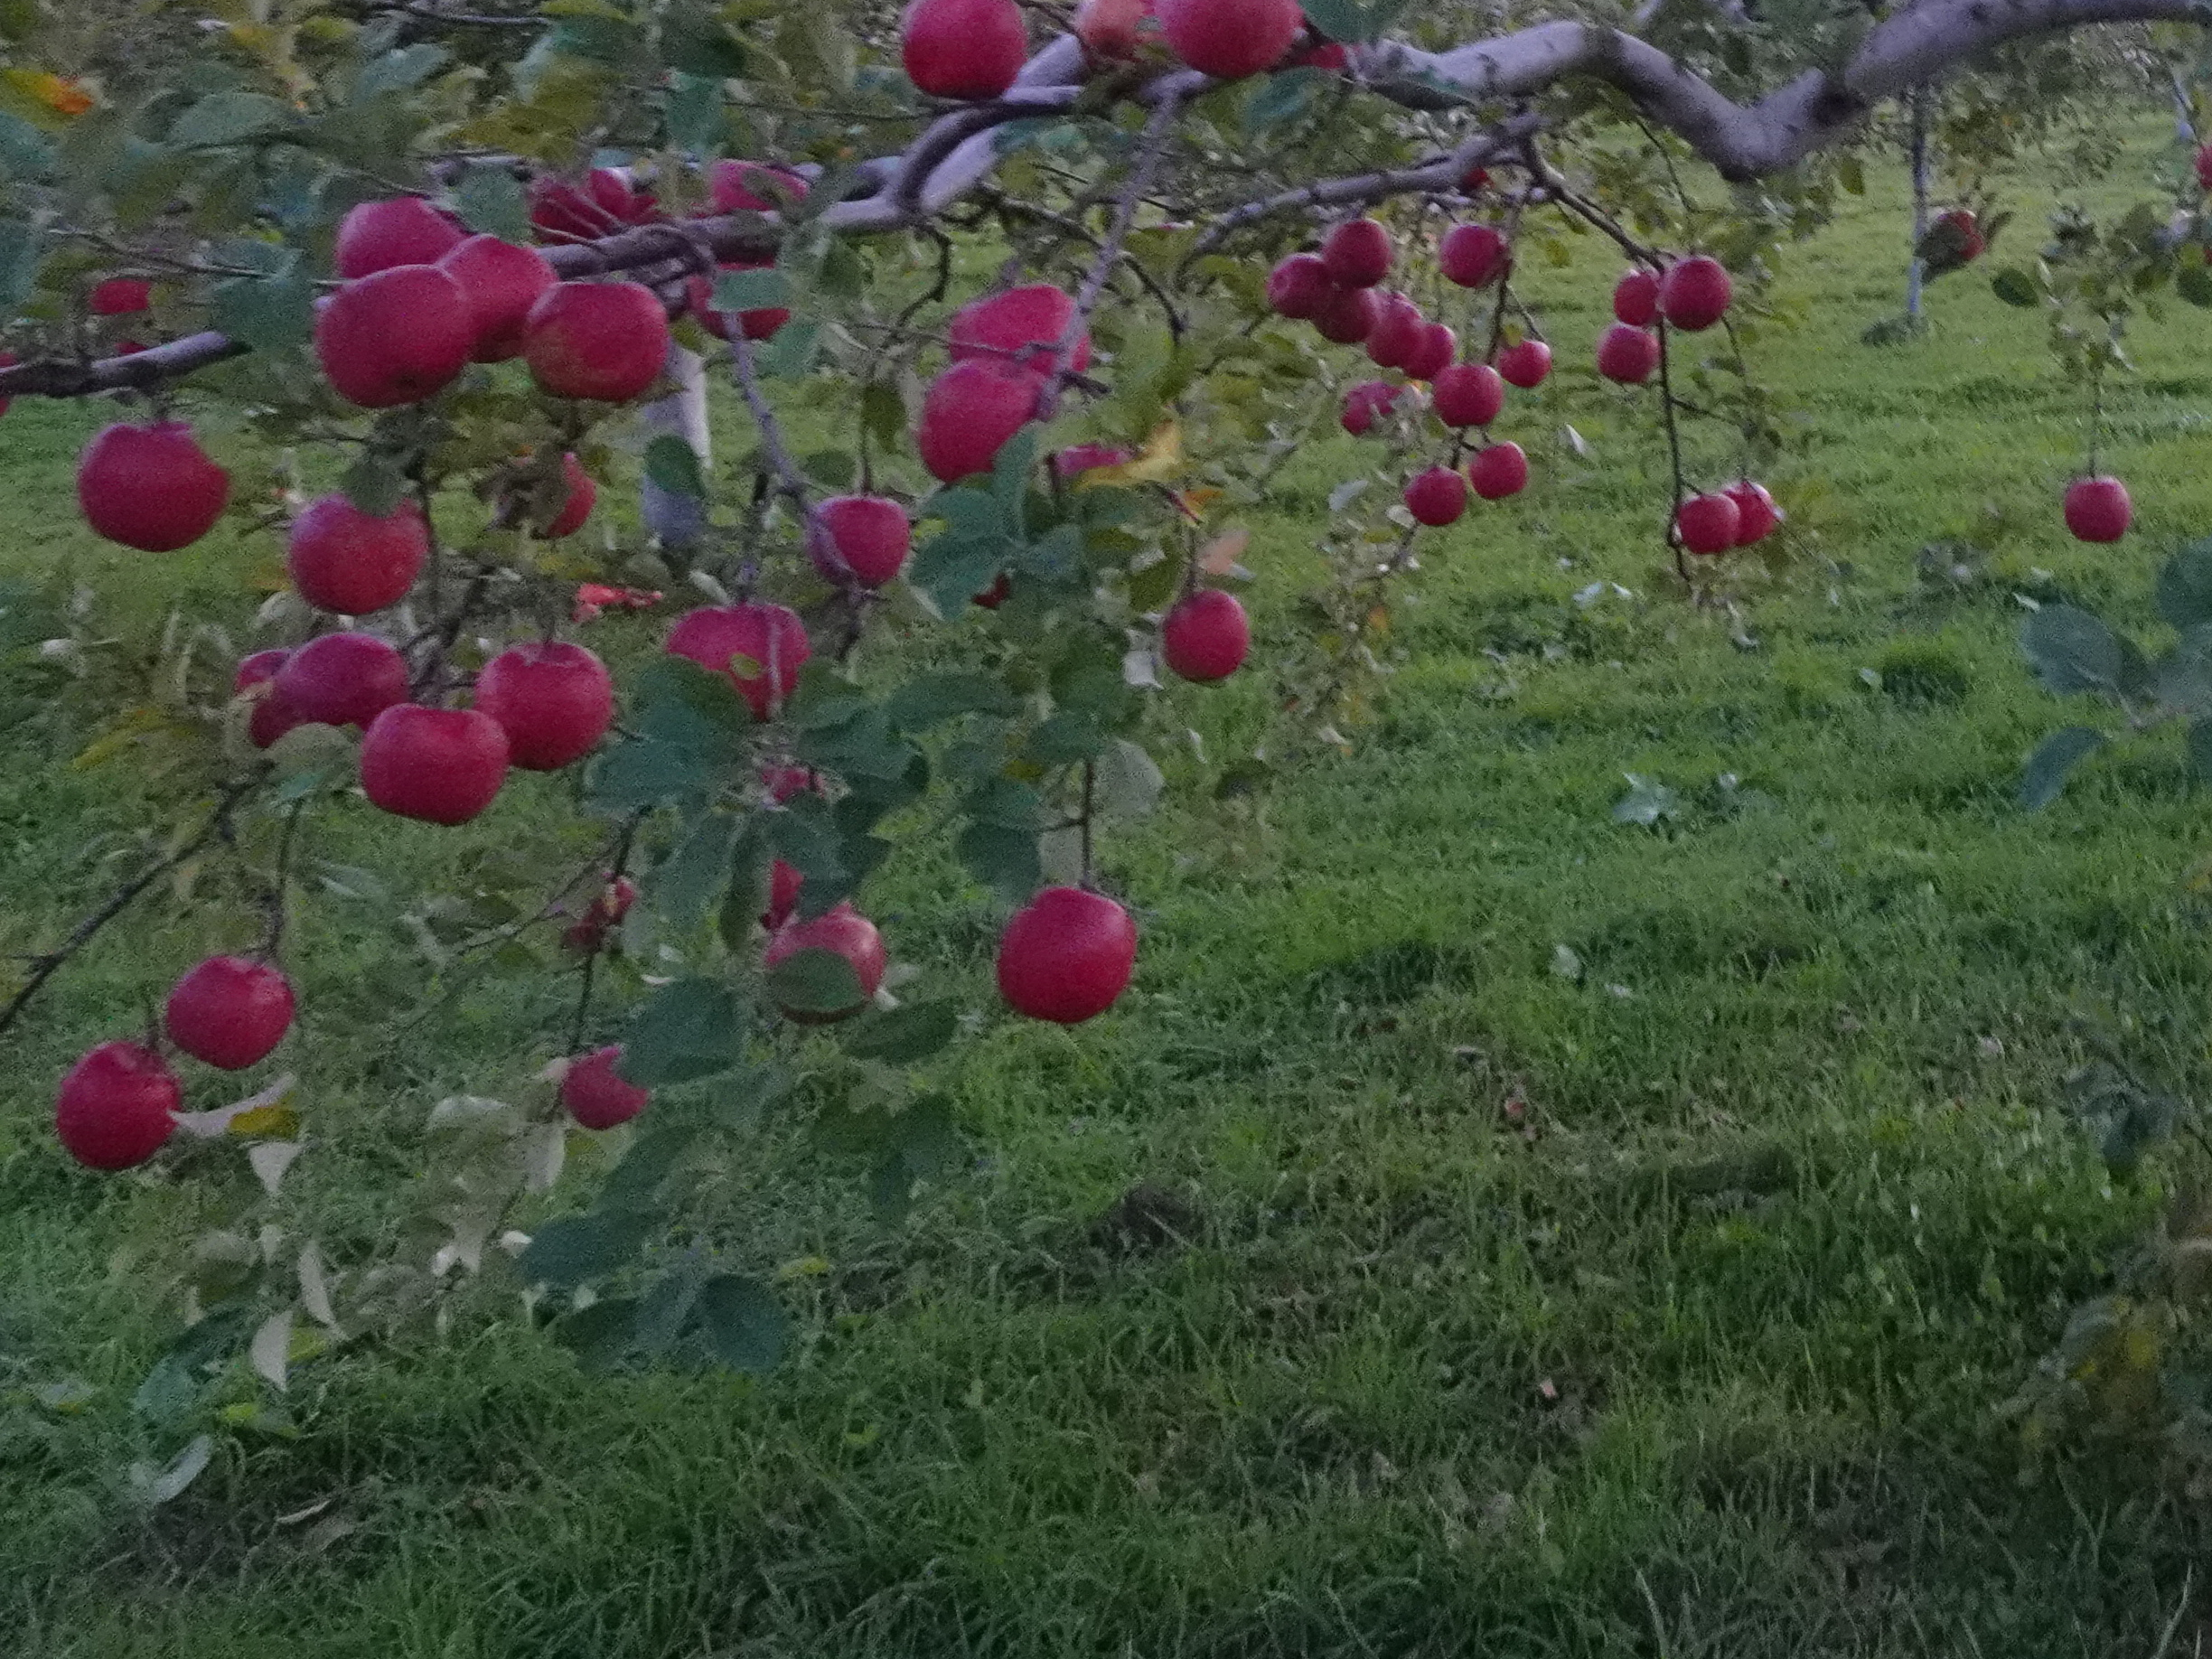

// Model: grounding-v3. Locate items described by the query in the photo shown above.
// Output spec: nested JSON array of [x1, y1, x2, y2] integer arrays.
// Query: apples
[[759, 858, 850, 936], [1401, 322, 1456, 381], [1460, 167, 1491, 193], [1160, 590, 1247, 682], [1056, 443, 1119, 475], [997, 887, 1136, 1024], [1497, 339, 1551, 388], [56, 1040, 181, 1171], [529, 167, 662, 246], [545, 451, 595, 539], [666, 603, 808, 722], [166, 956, 294, 1070], [336, 198, 471, 280], [811, 495, 909, 590], [697, 158, 809, 218], [1469, 441, 1527, 500], [1597, 325, 1659, 384], [1936, 209, 1984, 261], [314, 264, 473, 408], [524, 281, 667, 403], [1157, 0, 1299, 79], [1677, 494, 1740, 554], [77, 420, 229, 553], [1323, 218, 1391, 288], [761, 765, 822, 805], [1662, 256, 1731, 331], [1341, 383, 1401, 436], [437, 235, 555, 364], [1438, 224, 1508, 289], [901, 0, 1027, 101], [1721, 481, 1775, 546], [972, 575, 1008, 610], [917, 358, 1052, 484], [1377, 288, 1408, 310], [1312, 283, 1379, 344], [948, 284, 1089, 380], [288, 495, 426, 615], [474, 641, 612, 770], [562, 1045, 647, 1130], [764, 914, 884, 995], [89, 278, 152, 353], [1076, 0, 1162, 61], [270, 632, 409, 734], [360, 703, 509, 826], [688, 264, 789, 341], [2063, 475, 2131, 543], [236, 649, 296, 750], [1365, 302, 1425, 368], [1268, 253, 1334, 319], [568, 874, 635, 947], [1404, 466, 1466, 526], [1432, 364, 1504, 427], [1275, 15, 1351, 75], [1613, 268, 1662, 326]]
